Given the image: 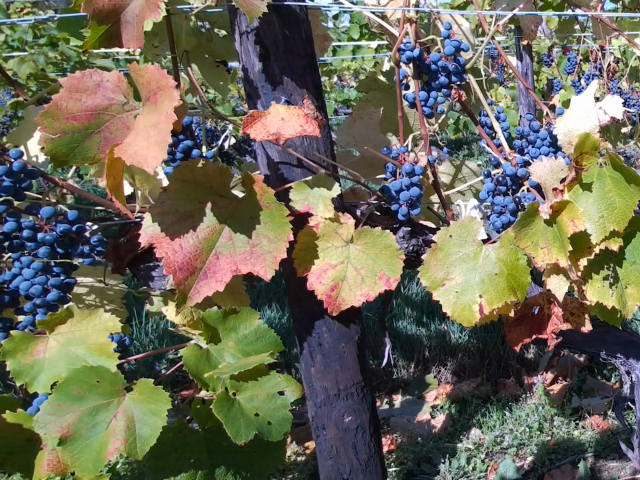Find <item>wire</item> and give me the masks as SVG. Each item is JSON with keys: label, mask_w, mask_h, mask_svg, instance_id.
Returning a JSON list of instances; mask_svg holds the SVG:
<instances>
[{"label": "wire", "mask_w": 640, "mask_h": 480, "mask_svg": "<svg viewBox=\"0 0 640 480\" xmlns=\"http://www.w3.org/2000/svg\"><path fill=\"white\" fill-rule=\"evenodd\" d=\"M272 6H306L316 8H331L336 10H373L384 12H406V11H419L425 13H446L455 15H468V16H488V15H533V16H567V17H580V16H601V17H621V18H635L639 17V12L623 13V12H604V11H536V10H486V11H470V10H457L448 8H427L421 6H403V7H386L375 5H338L333 3H318L308 1H272Z\"/></svg>", "instance_id": "d2f4af69"}, {"label": "wire", "mask_w": 640, "mask_h": 480, "mask_svg": "<svg viewBox=\"0 0 640 480\" xmlns=\"http://www.w3.org/2000/svg\"><path fill=\"white\" fill-rule=\"evenodd\" d=\"M85 16H86L85 12H69V13H53V14H43V15H33V16H21V17H13V18H1L0 24L55 19V18L85 17Z\"/></svg>", "instance_id": "a73af890"}]
</instances>
